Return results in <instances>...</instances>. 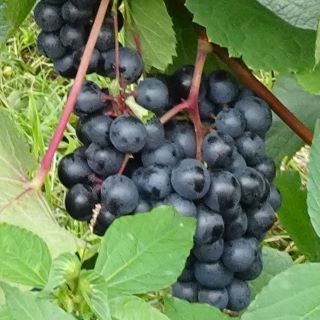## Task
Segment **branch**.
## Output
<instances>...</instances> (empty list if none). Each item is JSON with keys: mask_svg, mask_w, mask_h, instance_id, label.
<instances>
[{"mask_svg": "<svg viewBox=\"0 0 320 320\" xmlns=\"http://www.w3.org/2000/svg\"><path fill=\"white\" fill-rule=\"evenodd\" d=\"M213 47V52L225 62L231 69L242 86L248 87L261 99L266 101L270 108L310 147L313 140V133L307 130L295 116L251 73L245 62L237 57L229 58L227 47H220L215 43L209 42Z\"/></svg>", "mask_w": 320, "mask_h": 320, "instance_id": "1", "label": "branch"}, {"mask_svg": "<svg viewBox=\"0 0 320 320\" xmlns=\"http://www.w3.org/2000/svg\"><path fill=\"white\" fill-rule=\"evenodd\" d=\"M186 0H178L176 8L191 22L192 26L199 34V40L208 41V36L206 35V27L201 24L192 22L193 14L188 10V8L184 5ZM209 42V41H208Z\"/></svg>", "mask_w": 320, "mask_h": 320, "instance_id": "2", "label": "branch"}]
</instances>
